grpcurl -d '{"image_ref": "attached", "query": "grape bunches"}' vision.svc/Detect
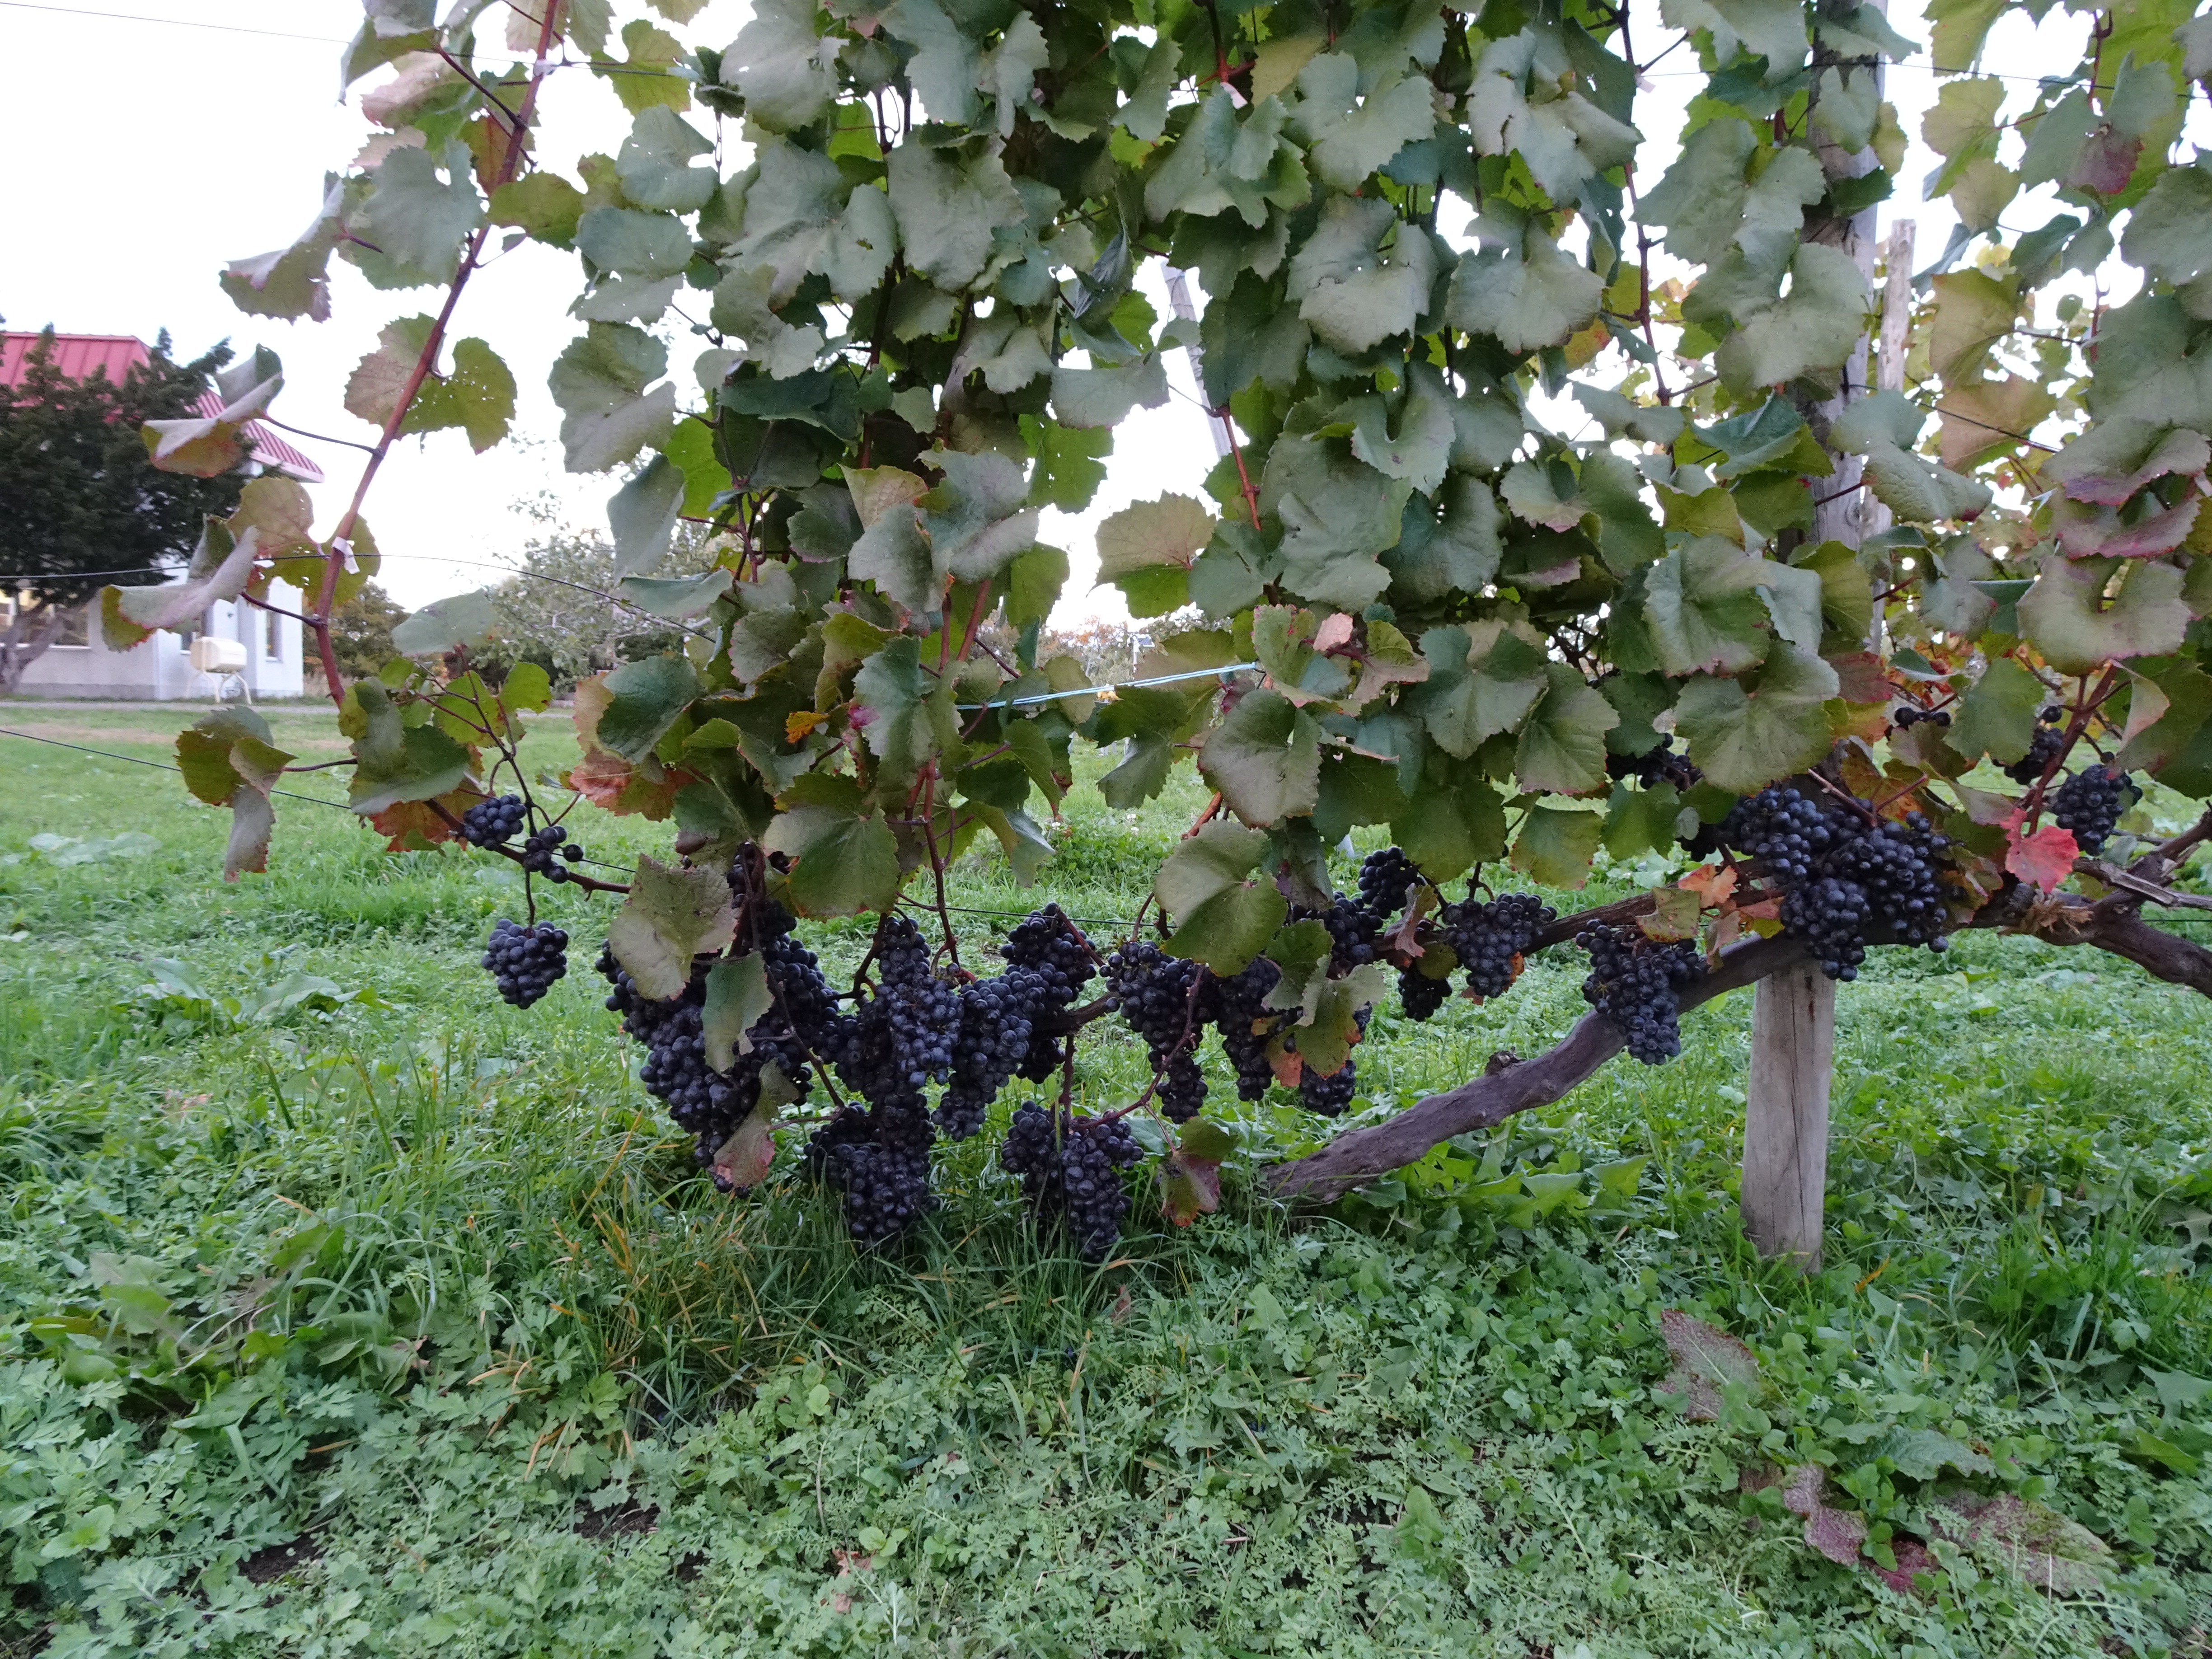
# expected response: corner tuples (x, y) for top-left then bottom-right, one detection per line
(1131, 959), (1221, 1125)
(1840, 807), (1956, 959)
(1282, 889), (1385, 988)
(1575, 917), (1689, 1070)
(481, 917), (570, 1013)
(747, 948), (840, 1068)
(810, 986), (919, 1110)
(1985, 697), (2062, 787)
(1734, 792), (1851, 914)
(995, 900), (1095, 1084)
(691, 1033), (812, 1192)
(455, 791), (525, 855)
(932, 972), (1050, 1140)
(1104, 939), (1178, 1036)
(522, 822), (582, 885)
(1347, 841), (1415, 930)
(1441, 889), (1561, 1001)
(1054, 1110), (1151, 1248)
(874, 1093), (936, 1183)
(1393, 914), (1454, 1023)
(1637, 749), (1742, 860)
(595, 920), (708, 1046)
(1284, 982), (1375, 1120)
(1001, 1100), (1089, 1217)
(679, 842), (797, 946)
(1775, 884), (1870, 981)
(839, 1138), (941, 1241)
(801, 1104), (898, 1213)
(887, 973), (962, 1090)
(639, 1007), (727, 1139)
(1882, 706), (1952, 765)
(2047, 748), (2143, 859)
(866, 914), (964, 1007)
(1218, 954), (1302, 1102)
